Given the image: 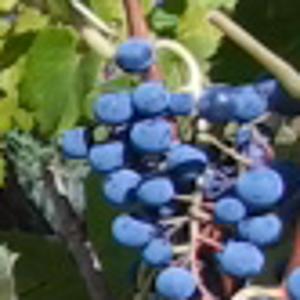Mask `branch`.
Here are the masks:
<instances>
[{"mask_svg":"<svg viewBox=\"0 0 300 300\" xmlns=\"http://www.w3.org/2000/svg\"><path fill=\"white\" fill-rule=\"evenodd\" d=\"M123 8L127 21L126 34L130 37L145 36L144 5L142 0H124Z\"/></svg>","mask_w":300,"mask_h":300,"instance_id":"obj_1","label":"branch"},{"mask_svg":"<svg viewBox=\"0 0 300 300\" xmlns=\"http://www.w3.org/2000/svg\"><path fill=\"white\" fill-rule=\"evenodd\" d=\"M147 79H155L159 82L165 81V75L162 73L159 62L154 61L149 69L141 74V80L145 81Z\"/></svg>","mask_w":300,"mask_h":300,"instance_id":"obj_2","label":"branch"}]
</instances>
